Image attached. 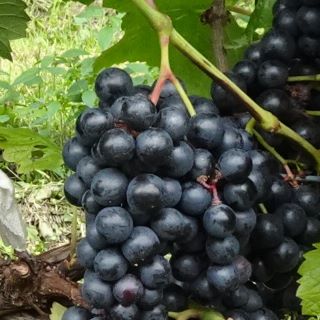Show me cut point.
<instances>
[{
    "instance_id": "6a23745f",
    "label": "cut point",
    "mask_w": 320,
    "mask_h": 320,
    "mask_svg": "<svg viewBox=\"0 0 320 320\" xmlns=\"http://www.w3.org/2000/svg\"><path fill=\"white\" fill-rule=\"evenodd\" d=\"M159 37L160 42V54H161V69L158 82L152 92L148 95L149 100L156 106L161 95L164 81L170 80L173 85L175 86L180 98L183 101V104L186 108L188 113L189 119L193 118L196 115V111L192 106L189 98L187 97L185 91L183 90L181 84L178 82L176 77L171 71L169 66V59H168V49H169V32L163 30L156 32Z\"/></svg>"
},
{
    "instance_id": "7d7e1d6f",
    "label": "cut point",
    "mask_w": 320,
    "mask_h": 320,
    "mask_svg": "<svg viewBox=\"0 0 320 320\" xmlns=\"http://www.w3.org/2000/svg\"><path fill=\"white\" fill-rule=\"evenodd\" d=\"M257 123V120L252 117L247 125L245 126L244 131L248 134H250V137H253L255 135V137L258 139V141L260 142V144L266 148L267 150H269L273 155H275L279 160H281L282 165L285 169L286 174H281V176L283 177V182H288V184L292 187V189H298L299 188V184L297 183V181L295 180V176L292 174L291 170L288 167V163H292V164H296L297 167V171L298 173L300 172V168L299 166L305 167L306 164L303 163H299L298 161L300 160L299 155H297L296 160H292V159H284L276 150L275 148L271 147L268 143H266L263 139V137L259 134V132H257L255 130V125Z\"/></svg>"
}]
</instances>
